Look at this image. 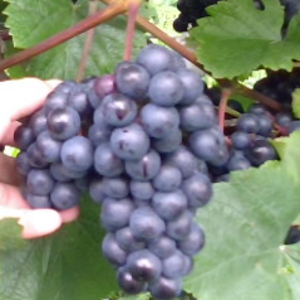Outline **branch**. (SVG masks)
Segmentation results:
<instances>
[{
	"instance_id": "1",
	"label": "branch",
	"mask_w": 300,
	"mask_h": 300,
	"mask_svg": "<svg viewBox=\"0 0 300 300\" xmlns=\"http://www.w3.org/2000/svg\"><path fill=\"white\" fill-rule=\"evenodd\" d=\"M142 4L143 0H88L87 18L76 22L24 51L0 60V69L15 66L85 32L84 51L76 74V79L81 81L84 77L87 61L91 53L94 27L104 24L118 16L128 15L129 6H137L139 8Z\"/></svg>"
},
{
	"instance_id": "2",
	"label": "branch",
	"mask_w": 300,
	"mask_h": 300,
	"mask_svg": "<svg viewBox=\"0 0 300 300\" xmlns=\"http://www.w3.org/2000/svg\"><path fill=\"white\" fill-rule=\"evenodd\" d=\"M218 84L223 87V92L221 95V99L219 100L218 107V126L223 127L225 124L226 101L228 100L230 93L235 91L248 99L256 100L275 109H278L280 107V104L277 101L269 98L267 95L251 90L250 88L243 86L238 82L220 79L218 81Z\"/></svg>"
},
{
	"instance_id": "3",
	"label": "branch",
	"mask_w": 300,
	"mask_h": 300,
	"mask_svg": "<svg viewBox=\"0 0 300 300\" xmlns=\"http://www.w3.org/2000/svg\"><path fill=\"white\" fill-rule=\"evenodd\" d=\"M137 24L141 26L145 32H149L152 36L173 48L176 52H179L187 61L192 63L198 69L201 71L205 70V65L197 61L196 55L187 46L179 43L175 38L168 35L160 27L154 23L146 21L144 17H139L137 19Z\"/></svg>"
}]
</instances>
